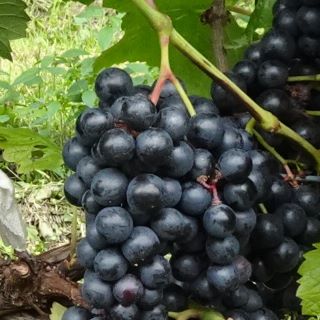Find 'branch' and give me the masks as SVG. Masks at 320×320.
Here are the masks:
<instances>
[{
	"label": "branch",
	"instance_id": "branch-1",
	"mask_svg": "<svg viewBox=\"0 0 320 320\" xmlns=\"http://www.w3.org/2000/svg\"><path fill=\"white\" fill-rule=\"evenodd\" d=\"M133 2L141 13L149 19L152 29L155 32L163 30L169 32V44L181 51L187 58L235 97L252 114V117L257 120L260 129L267 133L286 136L304 149L314 162V167L317 172L316 176H320V149L317 150L310 142L282 123L274 114L261 108L215 68L198 50L174 30L171 18L159 12L155 8L153 0H133Z\"/></svg>",
	"mask_w": 320,
	"mask_h": 320
}]
</instances>
